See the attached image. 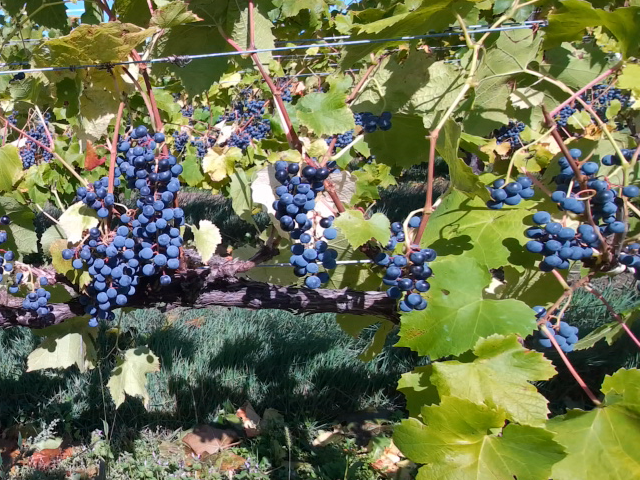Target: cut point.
<instances>
[{
  "label": "cut point",
  "instance_id": "6a23745f",
  "mask_svg": "<svg viewBox=\"0 0 640 480\" xmlns=\"http://www.w3.org/2000/svg\"><path fill=\"white\" fill-rule=\"evenodd\" d=\"M549 134H550V131H549V129H547V131H546L544 134H542L540 137H538L537 139H534V140H532V141L528 142L525 146L521 147V148H520V151H524V150L528 149V148H529V146H531V145H533V144H535V143H537V142L541 141L542 139H544L545 137H547Z\"/></svg>",
  "mask_w": 640,
  "mask_h": 480
},
{
  "label": "cut point",
  "instance_id": "deb38ca7",
  "mask_svg": "<svg viewBox=\"0 0 640 480\" xmlns=\"http://www.w3.org/2000/svg\"><path fill=\"white\" fill-rule=\"evenodd\" d=\"M572 297H573V294H572L570 297H568V298H567V301H566V303H565V305H564L563 309H562V310L557 314V317H561V315H562V314L567 310V308H568V306H569V304H570V301H571Z\"/></svg>",
  "mask_w": 640,
  "mask_h": 480
},
{
  "label": "cut point",
  "instance_id": "7d7e1d6f",
  "mask_svg": "<svg viewBox=\"0 0 640 480\" xmlns=\"http://www.w3.org/2000/svg\"><path fill=\"white\" fill-rule=\"evenodd\" d=\"M423 211H424V208H420V209H416V210L412 211L411 213H409V214L407 215V218H406V219H405V221H404V236H407V224H408V222H409L410 218H411L413 215H415V214H417V213H419V212H423Z\"/></svg>",
  "mask_w": 640,
  "mask_h": 480
}]
</instances>
